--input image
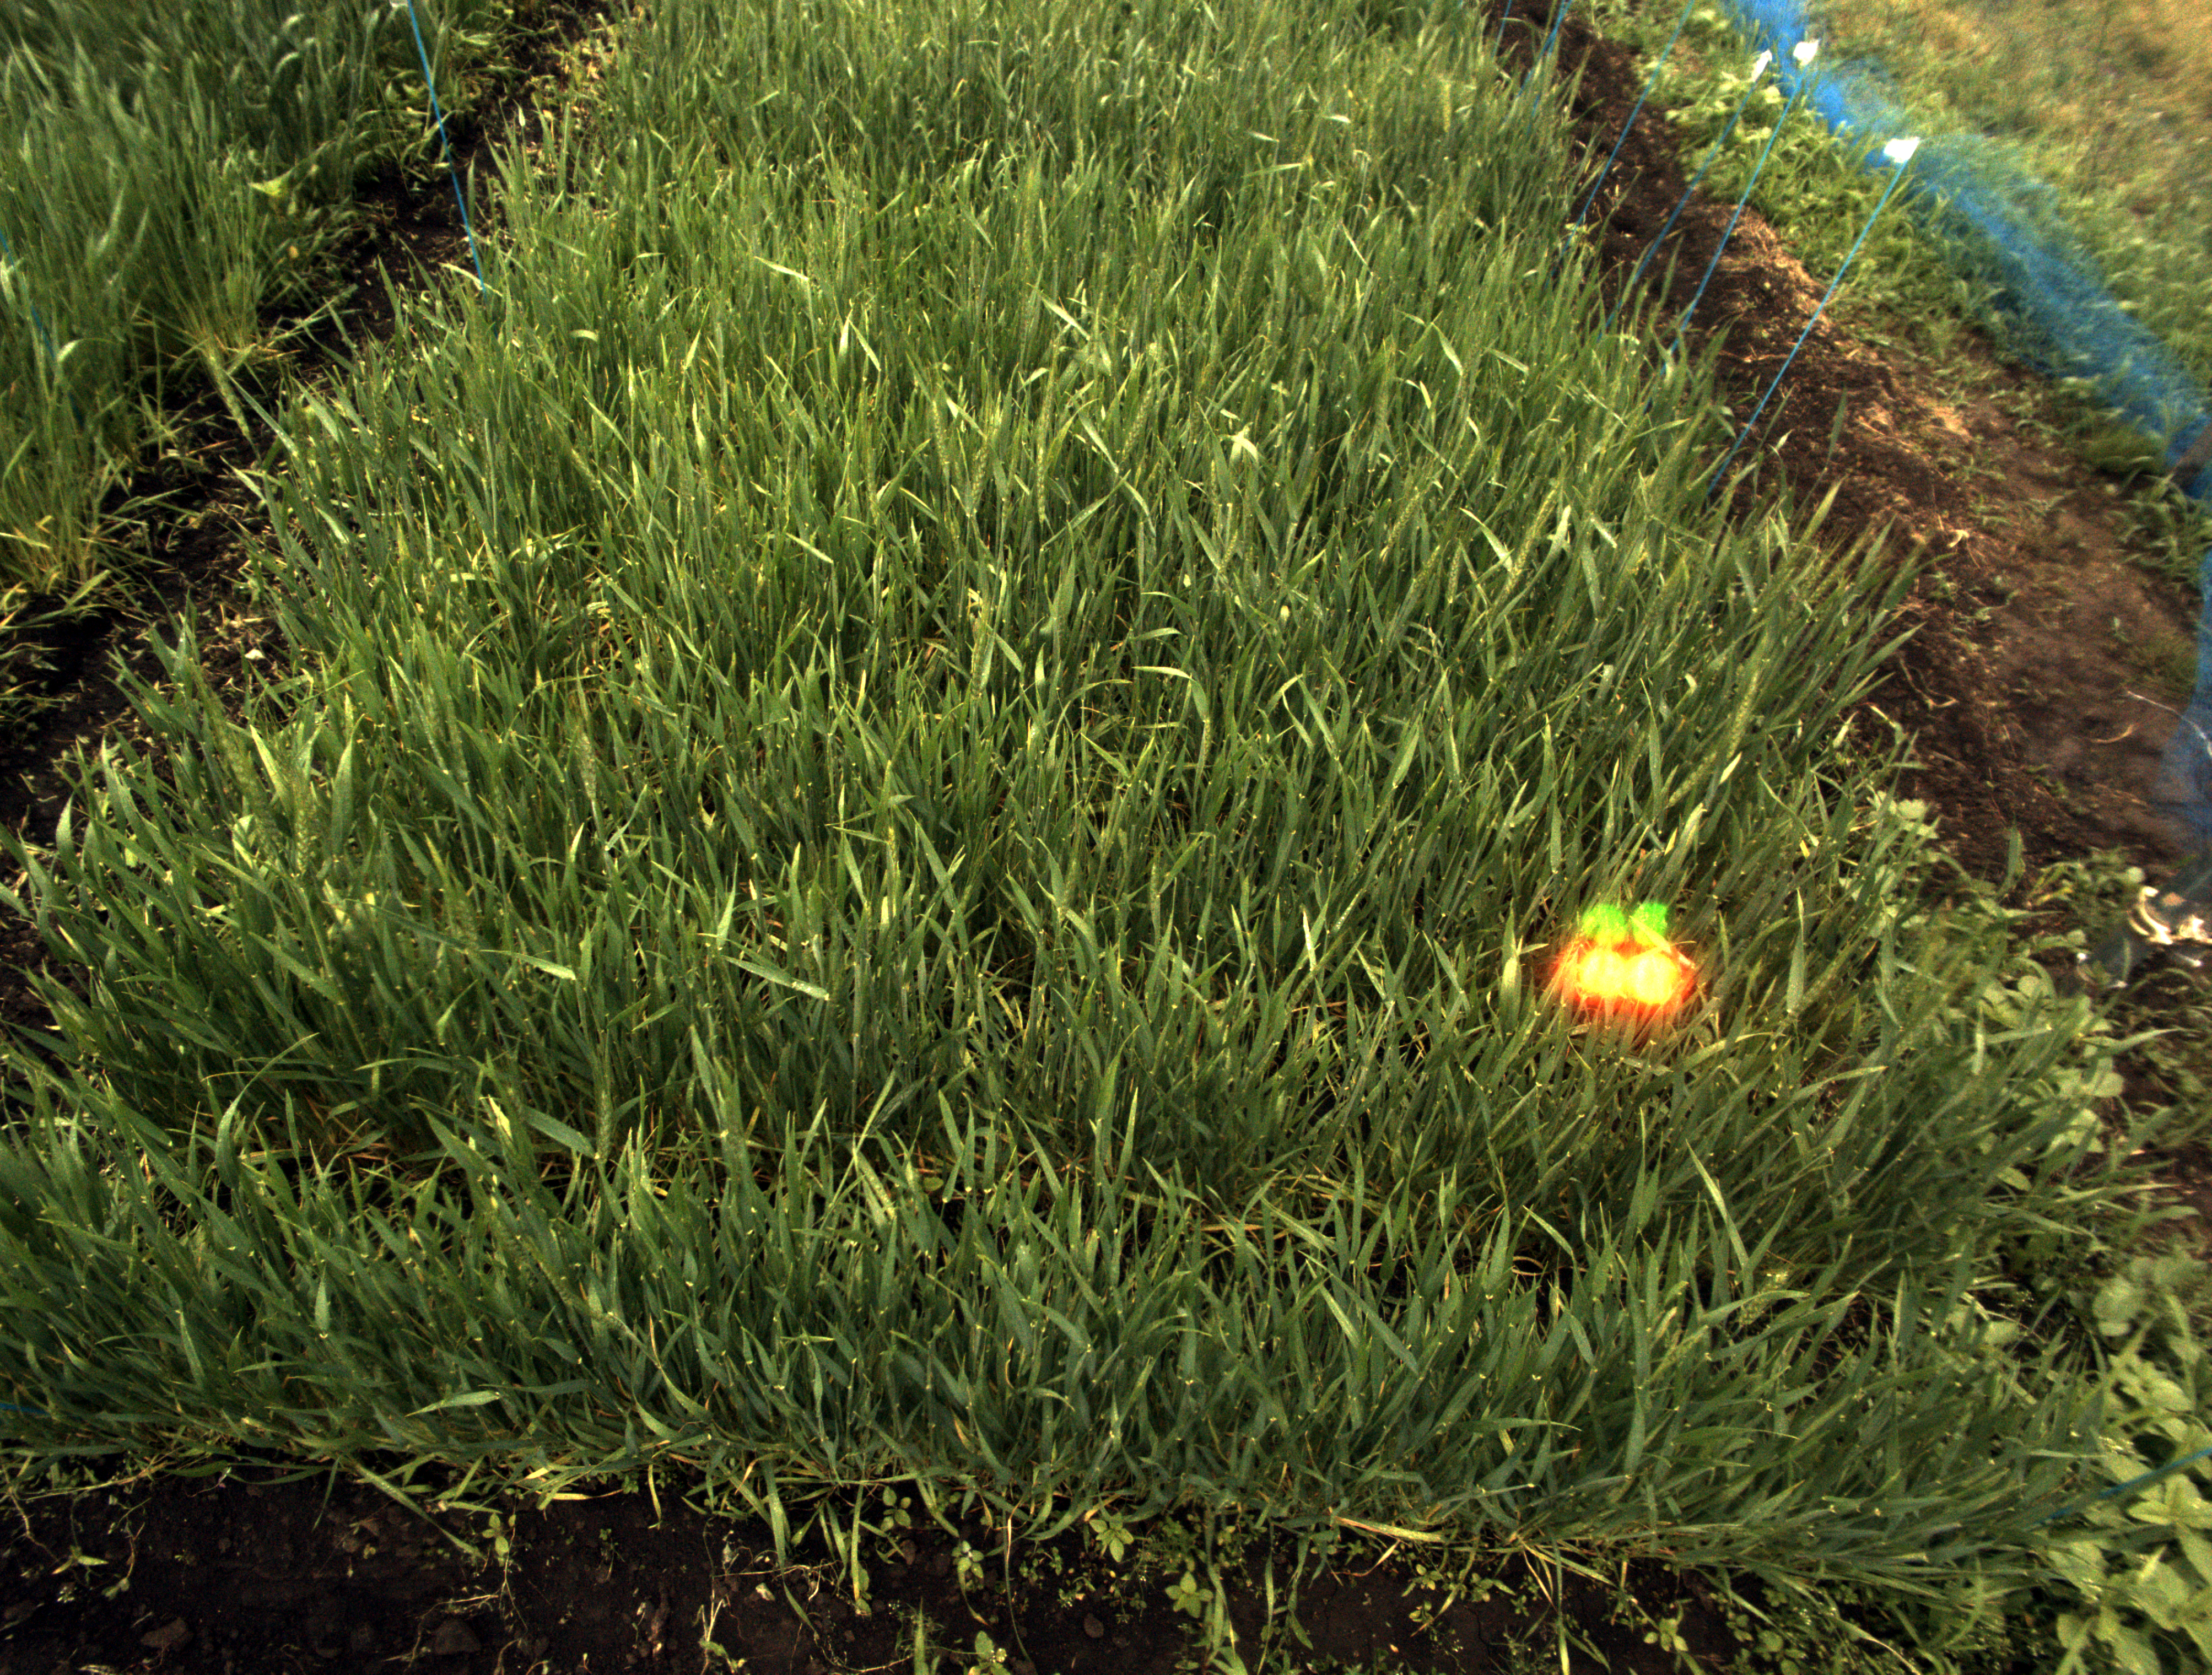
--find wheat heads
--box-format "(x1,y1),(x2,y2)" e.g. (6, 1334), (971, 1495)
(1073, 123), (1086, 179)
(598, 1087), (612, 1164)
(1645, 572), (1682, 632)
(1706, 657), (1725, 690)
(1700, 1523), (1753, 1538)
(1232, 248), (1251, 308)
(809, 219), (823, 299)
(1662, 1332), (1705, 1369)
(540, 1260), (566, 1306)
(1219, 308), (1232, 339)
(865, 445), (881, 523)
(1641, 567), (1678, 624)
(1320, 678), (1330, 703)
(278, 747), (293, 818)
(202, 351), (251, 437)
(1412, 543), (1439, 588)
(247, 779), (280, 834)
(860, 1158), (894, 1215)
(1022, 192), (1032, 255)
(786, 427), (798, 487)
(886, 826), (898, 866)
(457, 899), (478, 954)
(1000, 457), (1018, 518)
(1374, 377), (1388, 441)
(494, 782), (508, 855)
(804, 884), (813, 939)
(1034, 28), (1042, 83)
(1205, 717), (1212, 761)
(1208, 457), (1224, 532)
(954, 458), (964, 490)
(1904, 951), (1933, 1026)
(1248, 545), (1254, 571)
(1449, 441), (1478, 496)
(212, 712), (248, 785)
(1057, 607), (1072, 661)
(1481, 425), (1510, 482)
(252, 816), (279, 871)
(1881, 556), (1916, 611)
(1241, 1), (1269, 75)
(1603, 372), (1621, 439)
(836, 908), (858, 946)
(1041, 366), (1054, 434)
(834, 197), (844, 250)
(1119, 382), (1153, 466)
(1642, 431), (1692, 522)
(1150, 860), (1159, 919)
(444, 694), (469, 780)
(1785, 960), (1838, 1027)
(930, 397), (948, 467)
(1581, 473), (1599, 523)
(1185, 308), (1195, 352)
(1895, 952), (1930, 1007)
(1893, 992), (1954, 1062)
(1447, 543), (1463, 599)
(1496, 538), (1535, 609)
(1669, 752), (1717, 808)
(504, 1087), (529, 1124)
(346, 441), (367, 483)
(1292, 117), (1306, 163)
(1620, 408), (1641, 448)
(423, 682), (446, 744)
(470, 401), (489, 450)
(1034, 447), (1047, 530)
(481, 1209), (536, 1290)
(595, 1310), (628, 1333)
(296, 808), (310, 876)
(1784, 552), (1830, 625)
(1441, 79), (1453, 132)
(570, 446), (604, 495)
(1603, 557), (1636, 619)
(891, 720), (911, 765)
(969, 443), (988, 510)
(1110, 1240), (1122, 1281)
(1626, 730), (1645, 777)
(1020, 292), (1028, 350)
(1086, 1230), (1098, 1260)
(1739, 1271), (1789, 1327)
(1533, 480), (1561, 537)
(1240, 491), (1257, 553)
(368, 376), (387, 461)
(717, 323), (724, 363)
(1725, 670), (1759, 760)
(1152, 165), (1176, 292)
(973, 632), (988, 700)
(1059, 859), (1077, 925)
(1807, 549), (1856, 606)
(1219, 527), (1237, 571)
(678, 454), (699, 528)
(950, 521), (961, 558)
(1190, 378), (1211, 441)
(1548, 1276), (1558, 1318)
(829, 972), (842, 1022)
(1387, 488), (1423, 547)
(948, 884), (973, 938)
(572, 730), (597, 798)
(472, 307), (495, 371)
(1752, 566), (1794, 620)
(707, 937), (731, 984)
(1284, 952), (1329, 1013)
(1575, 388), (1598, 468)
(289, 397), (309, 468)
(1299, 480), (1312, 509)
(1164, 405), (1177, 449)
(865, 901), (871, 949)
(722, 1094), (746, 1169)
(292, 773), (312, 820)
(1458, 316), (1487, 397)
